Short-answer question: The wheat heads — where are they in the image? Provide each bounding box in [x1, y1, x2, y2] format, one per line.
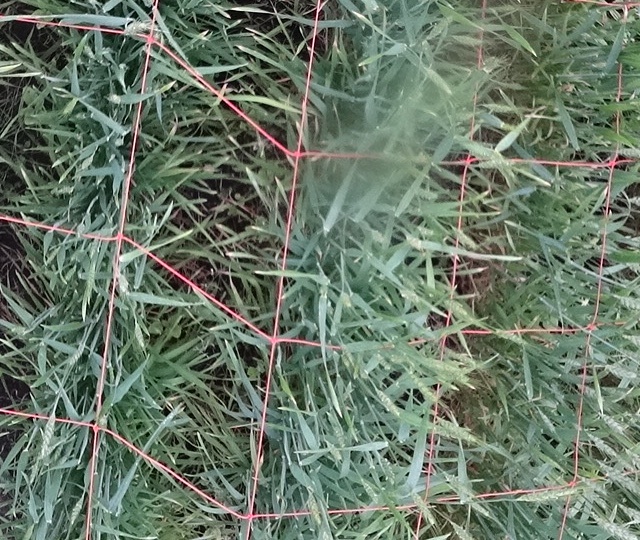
[322, 441, 339, 462]
[619, 502, 640, 525]
[534, 410, 554, 434]
[111, 93, 122, 107]
[588, 433, 613, 454]
[452, 520, 473, 540]
[480, 160, 512, 168]
[454, 226, 475, 246]
[46, 246, 60, 264]
[442, 469, 474, 495]
[427, 13, 452, 39]
[90, 229, 102, 255]
[405, 230, 422, 251]
[578, 382, 598, 399]
[442, 294, 466, 316]
[514, 486, 574, 503]
[407, 370, 432, 401]
[617, 144, 640, 159]
[381, 455, 395, 479]
[605, 362, 634, 382]
[614, 294, 640, 309]
[561, 355, 577, 369]
[88, 265, 95, 298]
[361, 478, 379, 504]
[305, 494, 320, 520]
[44, 411, 56, 447]
[426, 67, 452, 99]
[410, 488, 433, 522]
[435, 417, 474, 444]
[77, 222, 85, 235]
[65, 264, 76, 279]
[461, 496, 486, 514]
[131, 322, 144, 345]
[123, 20, 145, 36]
[424, 356, 464, 383]
[374, 351, 386, 370]
[71, 499, 85, 521]
[371, 229, 387, 244]
[331, 421, 346, 447]
[70, 344, 85, 364]
[458, 138, 497, 157]
[376, 388, 394, 415]
[594, 515, 630, 540]
[338, 288, 352, 304]
[84, 154, 92, 167]
[412, 186, 438, 198]
[491, 326, 527, 346]
[597, 460, 633, 487]
[482, 98, 511, 113]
